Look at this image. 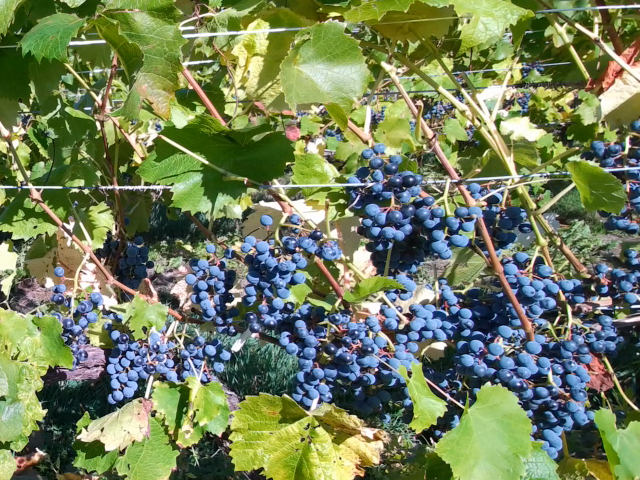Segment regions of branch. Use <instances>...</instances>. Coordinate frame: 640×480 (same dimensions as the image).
<instances>
[{
	"mask_svg": "<svg viewBox=\"0 0 640 480\" xmlns=\"http://www.w3.org/2000/svg\"><path fill=\"white\" fill-rule=\"evenodd\" d=\"M513 182L515 184H517L518 187V193L520 196V200L522 205L524 206L525 210H526V214L528 216V220L530 223V227L532 228V230L534 231V233L537 236L538 239V243L542 244V247L540 248L542 253L545 256V259L547 261L548 264H552L553 260L550 257V254L548 252V250L546 249L545 245H544V241H543V236L541 234V231L539 230V228L536 226L533 215L535 217L536 221H539V223L543 226V228L553 237V239L556 241V243L561 247V249L563 250V252L566 255V258L568 259L569 262H571L575 268H577L580 271H584L585 267L580 265L573 253L571 252V250L566 246V244L562 241V239L560 238V236L558 234H556V232L552 229V227L550 226V223L541 215L538 204L529 196V194L526 192L525 187L523 186V184L521 183V181L517 178L513 179Z\"/></svg>",
	"mask_w": 640,
	"mask_h": 480,
	"instance_id": "branch-2",
	"label": "branch"
},
{
	"mask_svg": "<svg viewBox=\"0 0 640 480\" xmlns=\"http://www.w3.org/2000/svg\"><path fill=\"white\" fill-rule=\"evenodd\" d=\"M257 336H258L260 339H263L264 341H266V342H268V343H271V344H273V345H278V344H279V341H278V340H275L274 338H271V337H269V336H266V335H265V334H263L262 332H258V333H257Z\"/></svg>",
	"mask_w": 640,
	"mask_h": 480,
	"instance_id": "branch-12",
	"label": "branch"
},
{
	"mask_svg": "<svg viewBox=\"0 0 640 480\" xmlns=\"http://www.w3.org/2000/svg\"><path fill=\"white\" fill-rule=\"evenodd\" d=\"M184 74L186 76V78L188 79V81L193 85V87L196 89V92L198 93V95L200 96V98L202 99V101L205 103L208 111L213 115V117L217 120V121H221L222 117L218 114V112L212 107V104L210 103L209 99L206 97L205 93L202 91L200 85L198 84V82L192 77V75L190 74V72L188 70L184 71Z\"/></svg>",
	"mask_w": 640,
	"mask_h": 480,
	"instance_id": "branch-7",
	"label": "branch"
},
{
	"mask_svg": "<svg viewBox=\"0 0 640 480\" xmlns=\"http://www.w3.org/2000/svg\"><path fill=\"white\" fill-rule=\"evenodd\" d=\"M457 187L462 191V193L464 194V196L466 197L468 203L472 206L475 207L476 203L474 202L473 198L471 197L470 193L468 192V190L466 189V187L461 183L458 182L457 183Z\"/></svg>",
	"mask_w": 640,
	"mask_h": 480,
	"instance_id": "branch-11",
	"label": "branch"
},
{
	"mask_svg": "<svg viewBox=\"0 0 640 480\" xmlns=\"http://www.w3.org/2000/svg\"><path fill=\"white\" fill-rule=\"evenodd\" d=\"M270 197L271 199L280 207L282 208L287 216L291 215V208L287 205V203L281 199L275 192V190H270L269 191Z\"/></svg>",
	"mask_w": 640,
	"mask_h": 480,
	"instance_id": "branch-10",
	"label": "branch"
},
{
	"mask_svg": "<svg viewBox=\"0 0 640 480\" xmlns=\"http://www.w3.org/2000/svg\"><path fill=\"white\" fill-rule=\"evenodd\" d=\"M398 57L402 61L404 65L408 68L412 69V71L418 75L422 80L432 84L436 89H438L444 96H446L452 105V107L457 110L459 113H463L469 121L474 125L477 131H479L481 137L485 140L489 147L495 152L497 157L502 160L505 166L508 168L511 174L517 173L515 169V165L511 162L513 156L508 152L506 145L504 144L502 137L499 135L495 127V123L493 120H490V116L488 114L483 115V120L486 124V130L478 123L475 119L474 115L461 103L459 99H456L444 89L438 82L434 80L432 76H430L427 72H425L422 68L418 67L408 56L403 55L402 53L398 54Z\"/></svg>",
	"mask_w": 640,
	"mask_h": 480,
	"instance_id": "branch-1",
	"label": "branch"
},
{
	"mask_svg": "<svg viewBox=\"0 0 640 480\" xmlns=\"http://www.w3.org/2000/svg\"><path fill=\"white\" fill-rule=\"evenodd\" d=\"M478 223H479V228H480V230L482 232V235H483V237H484V239H485V241L487 243V248H488V251H489V253L491 255L492 262H493V264L495 266V269H496L497 273L499 274V277H500V279L502 281V284H503V286H504V288H505V290H506V292H507V294H508V296H509V298H510V300L512 302L514 310L521 317V319L525 322V324L528 326V337H529V340L530 341H534L535 337H534V334H533V324L530 321V319L520 309V307L518 305V302L516 300V297L513 294L512 290H511V288H510V286L508 284V281L506 280V276H505L504 272L502 271V269L500 267L499 261L497 260V256H496L495 250L493 249L492 240L489 237V234H488V232L486 230V227L484 225V219L483 218H479L478 219Z\"/></svg>",
	"mask_w": 640,
	"mask_h": 480,
	"instance_id": "branch-5",
	"label": "branch"
},
{
	"mask_svg": "<svg viewBox=\"0 0 640 480\" xmlns=\"http://www.w3.org/2000/svg\"><path fill=\"white\" fill-rule=\"evenodd\" d=\"M369 56L376 62L377 65H379L382 70L384 72H386L387 74L390 75V77L392 78L394 84L396 85V87L398 88V90L401 92L405 102L407 103V106L409 108V110L411 111V113L414 115L415 119L417 120L418 123L421 124V127L424 130V133L426 134L429 143L431 144L432 148L434 149L436 155L438 156V158L441 160V162L444 164L447 173L453 178V177H458L457 173L453 170V168L451 167L450 163L448 162V160L444 157V155L442 154L441 150L439 149L437 143L435 142L429 127L427 126L426 122L421 118L419 112L416 110V108L414 107L412 100L410 99L409 95L407 94L406 90L404 89V87L402 86V84L400 83L399 79L397 78L395 72L391 69H389L385 63L383 61H381L374 52H370Z\"/></svg>",
	"mask_w": 640,
	"mask_h": 480,
	"instance_id": "branch-4",
	"label": "branch"
},
{
	"mask_svg": "<svg viewBox=\"0 0 640 480\" xmlns=\"http://www.w3.org/2000/svg\"><path fill=\"white\" fill-rule=\"evenodd\" d=\"M315 262L319 265V267L321 268V270L325 274L327 280L330 282V284L334 287L335 291L338 293L339 299L341 300V302L343 304V307L345 309H349L350 305L348 304V301H347L346 297L343 294V290L339 287V285L336 283L334 278L331 276V274H330L329 270L327 269L326 265L322 262V260L319 257L315 258Z\"/></svg>",
	"mask_w": 640,
	"mask_h": 480,
	"instance_id": "branch-8",
	"label": "branch"
},
{
	"mask_svg": "<svg viewBox=\"0 0 640 480\" xmlns=\"http://www.w3.org/2000/svg\"><path fill=\"white\" fill-rule=\"evenodd\" d=\"M7 145L8 148L10 149V152L13 155L14 161L16 162V165L19 169V172L21 174V177L23 178L24 182L26 184H33L32 179L30 178L28 171L23 163V160L21 159V155L17 149V147L15 146V142L12 138H9L7 140Z\"/></svg>",
	"mask_w": 640,
	"mask_h": 480,
	"instance_id": "branch-6",
	"label": "branch"
},
{
	"mask_svg": "<svg viewBox=\"0 0 640 480\" xmlns=\"http://www.w3.org/2000/svg\"><path fill=\"white\" fill-rule=\"evenodd\" d=\"M30 198L33 202H35L40 209L44 212L51 214L59 223L61 232L70 240L72 244H74L77 248H79L84 254L89 255V259L92 260L97 269L107 278V280L112 283L116 288L121 290L123 293L128 295H133L135 290L133 288L127 287L123 283H121L116 277L112 275V273L104 266L98 256L93 253L87 246H85L79 239H77L74 234L68 229V227L60 221V216L48 209L46 205L40 200L37 190H30Z\"/></svg>",
	"mask_w": 640,
	"mask_h": 480,
	"instance_id": "branch-3",
	"label": "branch"
},
{
	"mask_svg": "<svg viewBox=\"0 0 640 480\" xmlns=\"http://www.w3.org/2000/svg\"><path fill=\"white\" fill-rule=\"evenodd\" d=\"M163 312L170 317L171 319H174L178 322H182L185 324H191V325H196V326H200V327H204L206 325V322L202 319H198V318H193V317H187L181 314H178L174 311H172L169 307H165L163 309Z\"/></svg>",
	"mask_w": 640,
	"mask_h": 480,
	"instance_id": "branch-9",
	"label": "branch"
}]
</instances>
